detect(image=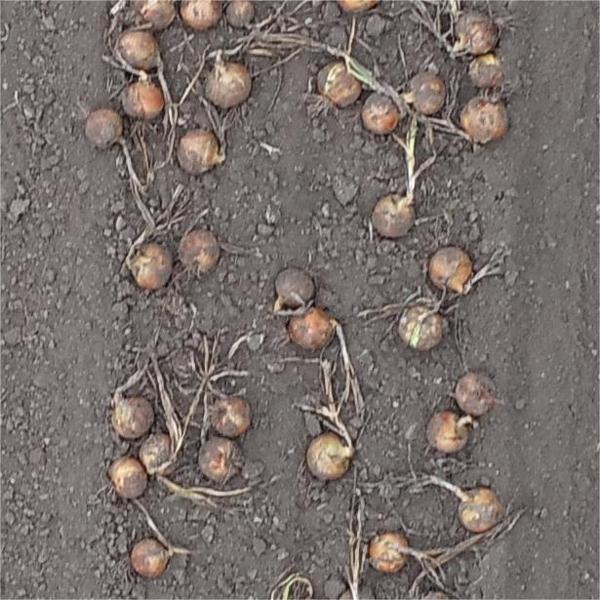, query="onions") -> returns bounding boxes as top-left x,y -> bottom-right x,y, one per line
405,70 -> 444,112
287,306 -> 331,348
106,457 -> 147,496
209,396 -> 248,437
456,487 -> 499,532
202,60 -> 248,106
426,246 -> 471,289
400,305 -> 445,348
181,2 -> 218,30
455,373 -> 494,414
371,193 -> 413,236
111,396 -> 150,437
319,62 -> 361,106
178,229 -> 218,272
198,438 -> 240,479
467,53 -> 503,89
127,239 -> 171,286
227,0 -> 255,29
359,93 -> 399,132
337,0 -> 376,15
427,410 -> 467,450
469,52 -> 503,71
118,29 -> 157,68
367,531 -> 410,572
456,11 -> 497,51
306,433 -> 350,477
142,0 -> 175,32
458,96 -> 504,141
138,432 -> 172,469
130,536 -> 167,576
177,128 -> 221,171
120,80 -> 165,119
275,266 -> 312,307
84,109 -> 123,148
